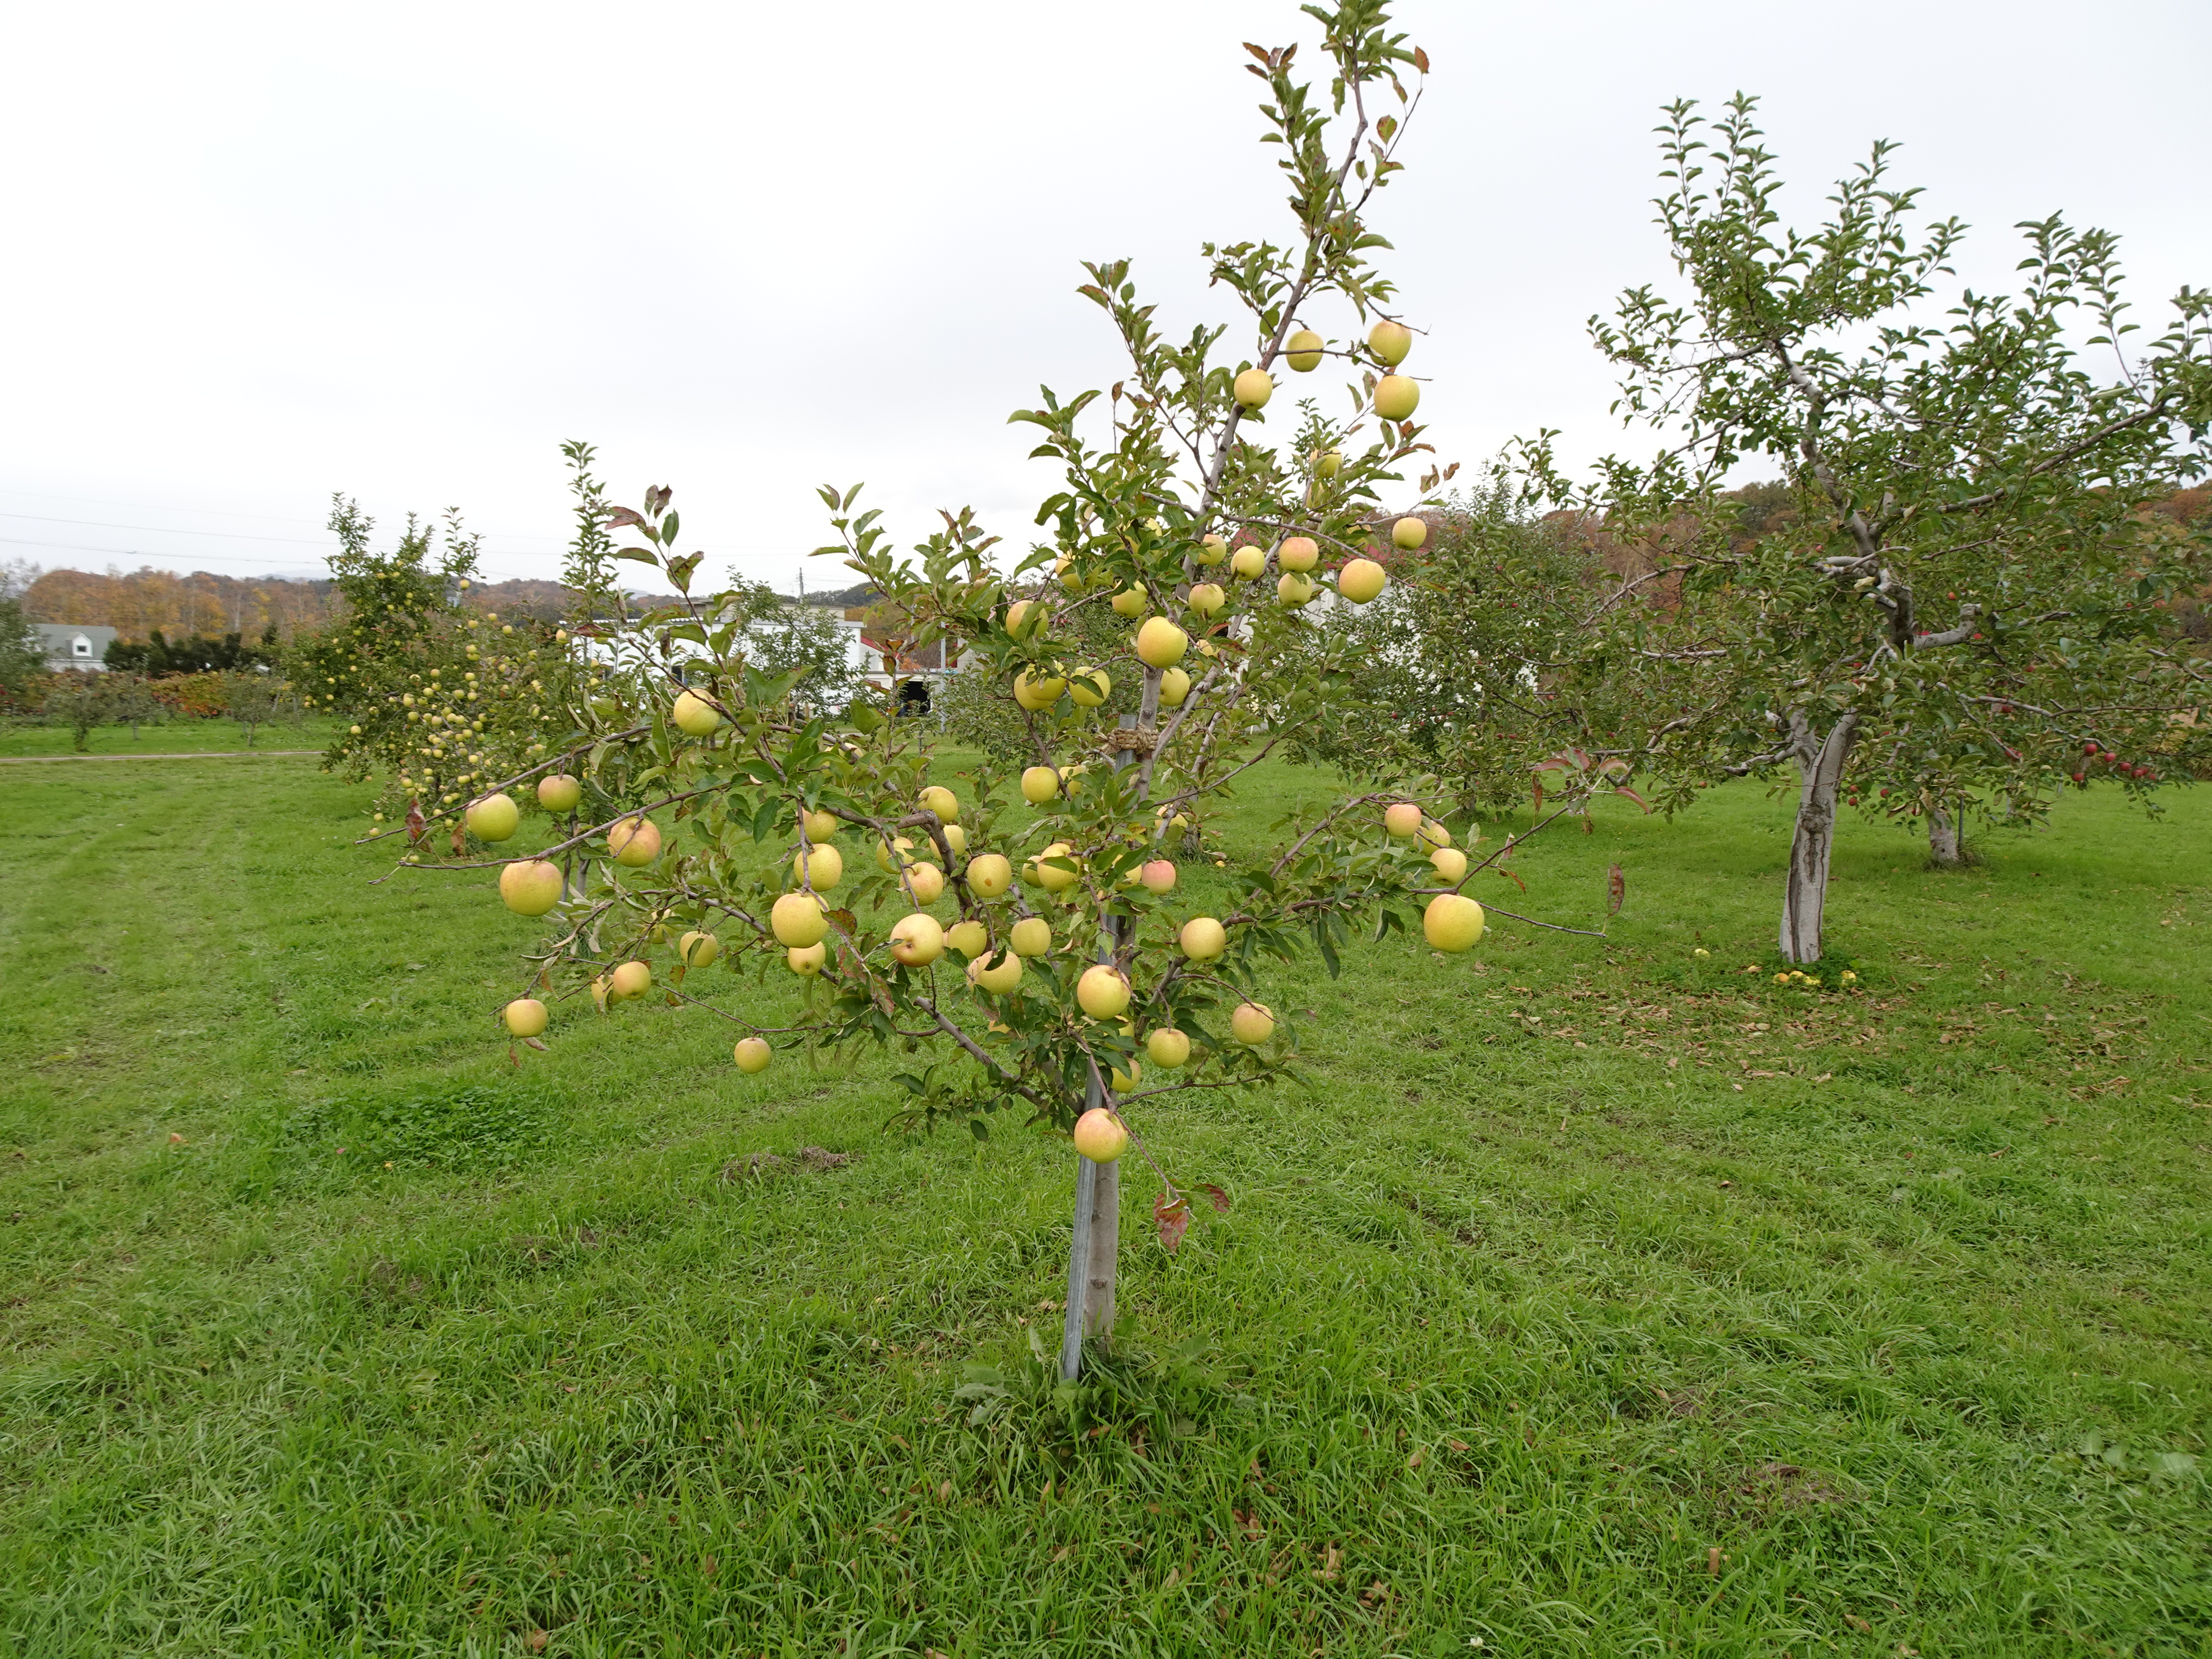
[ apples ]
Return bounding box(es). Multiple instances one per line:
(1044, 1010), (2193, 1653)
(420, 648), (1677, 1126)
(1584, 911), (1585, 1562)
(1347, 524), (1372, 550)
(679, 931), (718, 968)
(1305, 482), (1327, 512)
(1384, 803), (1421, 837)
(889, 913), (943, 967)
(1077, 965), (1131, 1020)
(948, 920), (987, 960)
(1021, 855), (1044, 888)
(537, 774), (581, 813)
(643, 908), (676, 944)
(1056, 549), (1098, 590)
(967, 854), (1012, 898)
(1074, 1108), (1128, 1164)
(1024, 660), (1067, 701)
(978, 949), (1022, 995)
(876, 836), (915, 874)
(1037, 843), (1083, 896)
(938, 929), (948, 962)
(1368, 321), (1412, 367)
(452, 793), (460, 800)
(1147, 1028), (1190, 1069)
(1279, 537), (1319, 574)
(1188, 583), (1225, 618)
(1115, 518), (1163, 555)
(795, 806), (837, 843)
(1105, 854), (1142, 890)
(1141, 859), (1176, 895)
(505, 999), (548, 1038)
(1234, 369), (1272, 410)
(1373, 375), (1419, 422)
(988, 1020), (1011, 1043)
(966, 956), (981, 993)
(465, 793), (519, 842)
(673, 688), (720, 736)
(787, 940), (826, 976)
(771, 892), (830, 948)
(1006, 600), (1049, 640)
(1158, 668), (1190, 706)
(1338, 558), (1385, 604)
(1413, 820), (1451, 857)
(1277, 572), (1312, 607)
(499, 860), (563, 917)
(929, 825), (966, 861)
(1429, 848), (1467, 886)
(1104, 1015), (1135, 1045)
(1014, 672), (1054, 711)
(1286, 330), (1325, 372)
(1230, 545), (1265, 581)
(1392, 517), (1427, 550)
(613, 961), (651, 1000)
(823, 743), (863, 788)
(899, 862), (943, 906)
(1057, 765), (1086, 796)
(734, 1037), (771, 1074)
(1916, 630), (1930, 636)
(1021, 766), (1058, 803)
(1010, 918), (1051, 957)
(1194, 639), (1221, 670)
(1423, 894), (1485, 953)
(1110, 1058), (1141, 1092)
(1231, 1002), (1274, 1045)
(1180, 917), (1226, 963)
(1069, 666), (1110, 707)
(1309, 446), (1342, 478)
(607, 816), (661, 867)
(1137, 616), (1188, 669)
(1111, 579), (1148, 619)
(1154, 803), (1191, 829)
(793, 843), (843, 892)
(1197, 534), (1227, 566)
(916, 786), (958, 824)
(591, 975), (624, 1005)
